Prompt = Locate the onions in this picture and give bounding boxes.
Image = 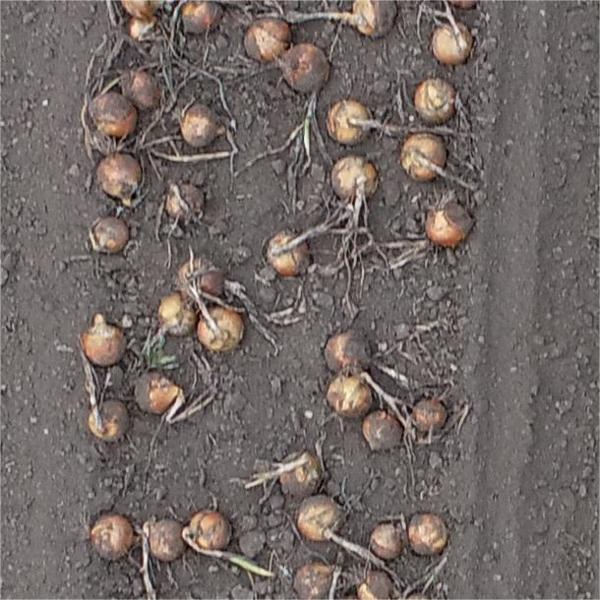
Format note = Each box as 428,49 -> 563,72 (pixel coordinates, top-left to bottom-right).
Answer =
410,398 -> 445,431
413,78 -> 455,119
180,257 -> 221,295
146,518 -> 181,558
352,0 -> 397,37
423,201 -> 470,244
95,152 -> 142,200
293,563 -> 331,600
280,449 -> 320,493
181,104 -> 223,147
294,494 -> 341,538
329,157 -> 377,199
195,306 -> 242,349
244,17 -> 288,59
185,509 -> 229,549
181,0 -> 220,32
357,574 -> 391,600
281,44 -> 327,91
81,324 -> 123,364
323,330 -> 364,370
121,2 -> 156,17
158,295 -> 194,333
137,375 -> 179,414
401,132 -> 445,179
327,98 -> 371,142
369,522 -> 401,559
131,15 -> 151,38
264,229 -> 308,276
164,181 -> 202,221
87,216 -> 125,251
327,373 -> 372,414
430,22 -> 471,63
85,401 -> 126,439
407,513 -> 446,552
89,93 -> 134,137
89,513 -> 133,558
121,68 -> 159,108
360,410 -> 399,448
